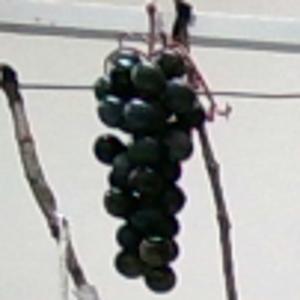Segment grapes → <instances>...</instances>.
<instances>
[{
  "mask_svg": "<svg viewBox=\"0 0 300 300\" xmlns=\"http://www.w3.org/2000/svg\"><path fill=\"white\" fill-rule=\"evenodd\" d=\"M109 67L94 84L96 115L103 126L132 140L105 133L93 145L97 162L113 166L104 210L125 223L115 233L122 250L114 267L128 279L142 276L152 292L167 293L177 283L170 268L180 254L176 215L187 203L176 183L181 162L193 155L191 132L205 122L206 108L195 88L180 80L188 61L177 50H161L151 62H141L137 49L124 46L114 51Z\"/></svg>",
  "mask_w": 300,
  "mask_h": 300,
  "instance_id": "1",
  "label": "grapes"
}]
</instances>
